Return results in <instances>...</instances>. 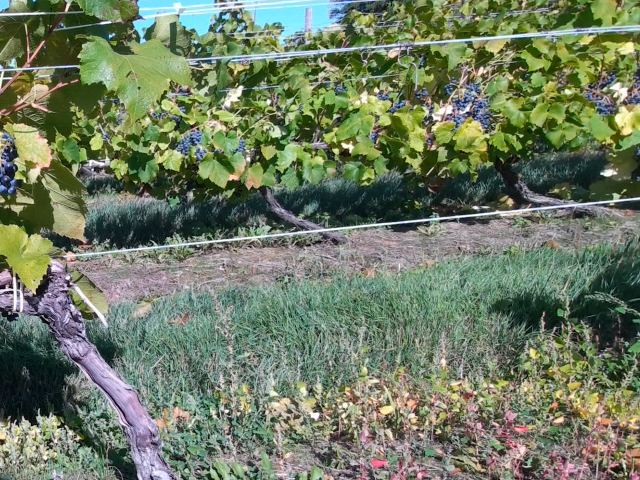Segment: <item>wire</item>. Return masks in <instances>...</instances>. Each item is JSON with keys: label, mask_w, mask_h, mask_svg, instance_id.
Masks as SVG:
<instances>
[{"label": "wire", "mask_w": 640, "mask_h": 480, "mask_svg": "<svg viewBox=\"0 0 640 480\" xmlns=\"http://www.w3.org/2000/svg\"><path fill=\"white\" fill-rule=\"evenodd\" d=\"M624 202H640V197H621V198H612L608 200H589L585 202L556 204V205L536 207V208L502 209V210H493V211H487V212L477 213V214L447 215V216H438V217H422V218H414V219H406V220H391V221H384V222L360 224V225L350 226V227H330L328 229H322V230H316V231H291V232L272 234V235H266V234L249 235V236H241V237H230V238H224V239H211V240L191 241V242H182V243H173V244H158V245H152V246H146V247L144 246L130 247L123 250L104 249L96 252L52 255L51 259L52 260L80 259L85 257H98L102 255H107V254L125 255L133 252H149V251L161 250V249H175V248L213 245V244H227V243L243 242V241H251V240H262V239L274 240V239H281V238H287V237H293V236H318V235L330 234L332 232H352V231L370 229L375 227L408 225V224L424 223V222H440V221H449V220L479 219V218H485V217L495 216V215L514 214V213H538V212H547V211L559 210V209L581 208V207H587L591 205H610L614 203H624Z\"/></svg>", "instance_id": "1"}, {"label": "wire", "mask_w": 640, "mask_h": 480, "mask_svg": "<svg viewBox=\"0 0 640 480\" xmlns=\"http://www.w3.org/2000/svg\"><path fill=\"white\" fill-rule=\"evenodd\" d=\"M598 33L606 34H628L640 33V25H620L616 27H587L576 28L559 31H541L539 33H514L509 35H483L478 37H463L457 39H440L433 41H413L409 43H382L371 44L360 47H339L333 49H314L313 51L291 52V53H270V54H232L220 55L213 57L193 56L188 57V62L204 61L216 62L222 60L228 61H249L264 60L271 57H292L316 54H336L342 52H363L374 49L397 48V49H413L420 46H435L443 44H459L465 42H480L486 40H512L516 38H542V37H566L570 35H593Z\"/></svg>", "instance_id": "2"}, {"label": "wire", "mask_w": 640, "mask_h": 480, "mask_svg": "<svg viewBox=\"0 0 640 480\" xmlns=\"http://www.w3.org/2000/svg\"><path fill=\"white\" fill-rule=\"evenodd\" d=\"M304 0H229V1H216L210 3H203L192 6H162V7H142V12H154L144 15V19L148 20L156 17L165 16H178L191 13H202L207 11H232L237 9H243L246 7H270L279 6L285 4H300Z\"/></svg>", "instance_id": "3"}, {"label": "wire", "mask_w": 640, "mask_h": 480, "mask_svg": "<svg viewBox=\"0 0 640 480\" xmlns=\"http://www.w3.org/2000/svg\"><path fill=\"white\" fill-rule=\"evenodd\" d=\"M84 10H62L52 12H25V13H7L1 12L0 16L5 18H27V17H55L64 15H84Z\"/></svg>", "instance_id": "4"}, {"label": "wire", "mask_w": 640, "mask_h": 480, "mask_svg": "<svg viewBox=\"0 0 640 480\" xmlns=\"http://www.w3.org/2000/svg\"><path fill=\"white\" fill-rule=\"evenodd\" d=\"M78 64L72 65H38L33 67H1L0 73L4 72H36L40 70H75Z\"/></svg>", "instance_id": "5"}, {"label": "wire", "mask_w": 640, "mask_h": 480, "mask_svg": "<svg viewBox=\"0 0 640 480\" xmlns=\"http://www.w3.org/2000/svg\"><path fill=\"white\" fill-rule=\"evenodd\" d=\"M112 24H113L112 20L96 21V22L76 25V26H72V27L58 28V29L55 30V33L56 34L68 33V32H74V31H78V30H83V29H88V28H93V27H98V26L112 25Z\"/></svg>", "instance_id": "6"}]
</instances>
